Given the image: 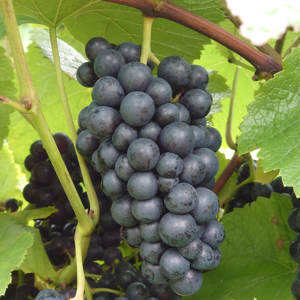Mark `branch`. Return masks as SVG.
<instances>
[{
  "instance_id": "obj_4",
  "label": "branch",
  "mask_w": 300,
  "mask_h": 300,
  "mask_svg": "<svg viewBox=\"0 0 300 300\" xmlns=\"http://www.w3.org/2000/svg\"><path fill=\"white\" fill-rule=\"evenodd\" d=\"M220 10L225 11L224 15L226 17H224V18L229 19L237 27V29H239V26L242 24V22L239 20V18L237 16L232 17V15L227 7H222V8H220Z\"/></svg>"
},
{
  "instance_id": "obj_2",
  "label": "branch",
  "mask_w": 300,
  "mask_h": 300,
  "mask_svg": "<svg viewBox=\"0 0 300 300\" xmlns=\"http://www.w3.org/2000/svg\"><path fill=\"white\" fill-rule=\"evenodd\" d=\"M101 1L117 3L148 12L157 18L168 19L214 40L241 56L256 69L252 77L254 81L266 79L267 82L270 78H274L273 75L283 70L281 54L287 32L280 39L275 40L274 49L269 43H265L261 47L255 46L256 48H254L251 44L241 40L226 29L197 14H193L170 0Z\"/></svg>"
},
{
  "instance_id": "obj_3",
  "label": "branch",
  "mask_w": 300,
  "mask_h": 300,
  "mask_svg": "<svg viewBox=\"0 0 300 300\" xmlns=\"http://www.w3.org/2000/svg\"><path fill=\"white\" fill-rule=\"evenodd\" d=\"M241 69V65L237 66L236 73L233 79V88L231 93V100H230V109H229V116L227 120V125L225 128V135L227 145L232 149L235 150V154L233 155L232 159L228 162L227 166L218 177L217 181L214 184L212 191L218 195L220 194L225 186L228 184L229 180L231 179L232 175L240 168L242 164L252 159V155L250 152L237 157V144L232 142V123H233V106L235 101V90H236V82L238 79V75Z\"/></svg>"
},
{
  "instance_id": "obj_1",
  "label": "branch",
  "mask_w": 300,
  "mask_h": 300,
  "mask_svg": "<svg viewBox=\"0 0 300 300\" xmlns=\"http://www.w3.org/2000/svg\"><path fill=\"white\" fill-rule=\"evenodd\" d=\"M0 21L7 31L20 83L19 104L3 95H0V102L11 107L23 119L29 122L34 131L37 133L42 147L47 151V155L49 156L57 178L67 195V199L78 223L74 234V260L72 264L68 265L57 274V283L60 286H69L76 280L85 265L91 235L99 225L100 197L97 195L93 183L91 182L86 162L77 152L75 147L76 129L62 79L60 57L56 41V29L54 27L49 28L51 51L54 58L57 81L62 98L63 114L65 116L66 123L68 124V130L78 159V165L87 189L89 212L82 204L77 188L74 186L66 165L63 162L55 139L44 121L41 110V102L39 97L36 95L35 87L30 78V71L23 52L22 42L20 40L18 20L11 0H0Z\"/></svg>"
}]
</instances>
